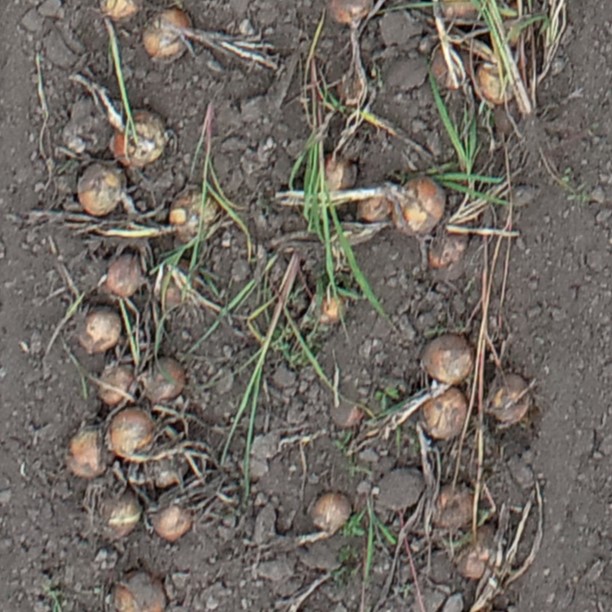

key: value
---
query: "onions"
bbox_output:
[492,103,520,129]
[107,408,155,456]
[310,491,349,532]
[115,111,166,166]
[64,426,110,479]
[424,235,463,273]
[151,503,190,540]
[73,164,122,215]
[438,488,480,529]
[420,388,466,437]
[77,308,121,353]
[442,0,478,26]
[471,64,514,103]
[150,447,188,488]
[139,356,188,401]
[143,12,191,57]
[320,296,347,323]
[96,489,140,535]
[497,3,535,45]
[322,151,357,189]
[327,0,369,27]
[398,178,443,232]
[111,575,163,612]
[169,195,213,239]
[93,363,134,404]
[329,398,359,428]
[359,193,393,225]
[102,256,144,297]
[158,264,197,307]
[99,0,136,19]
[457,534,499,577]
[433,44,466,89]
[487,372,530,423]
[421,334,472,383]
